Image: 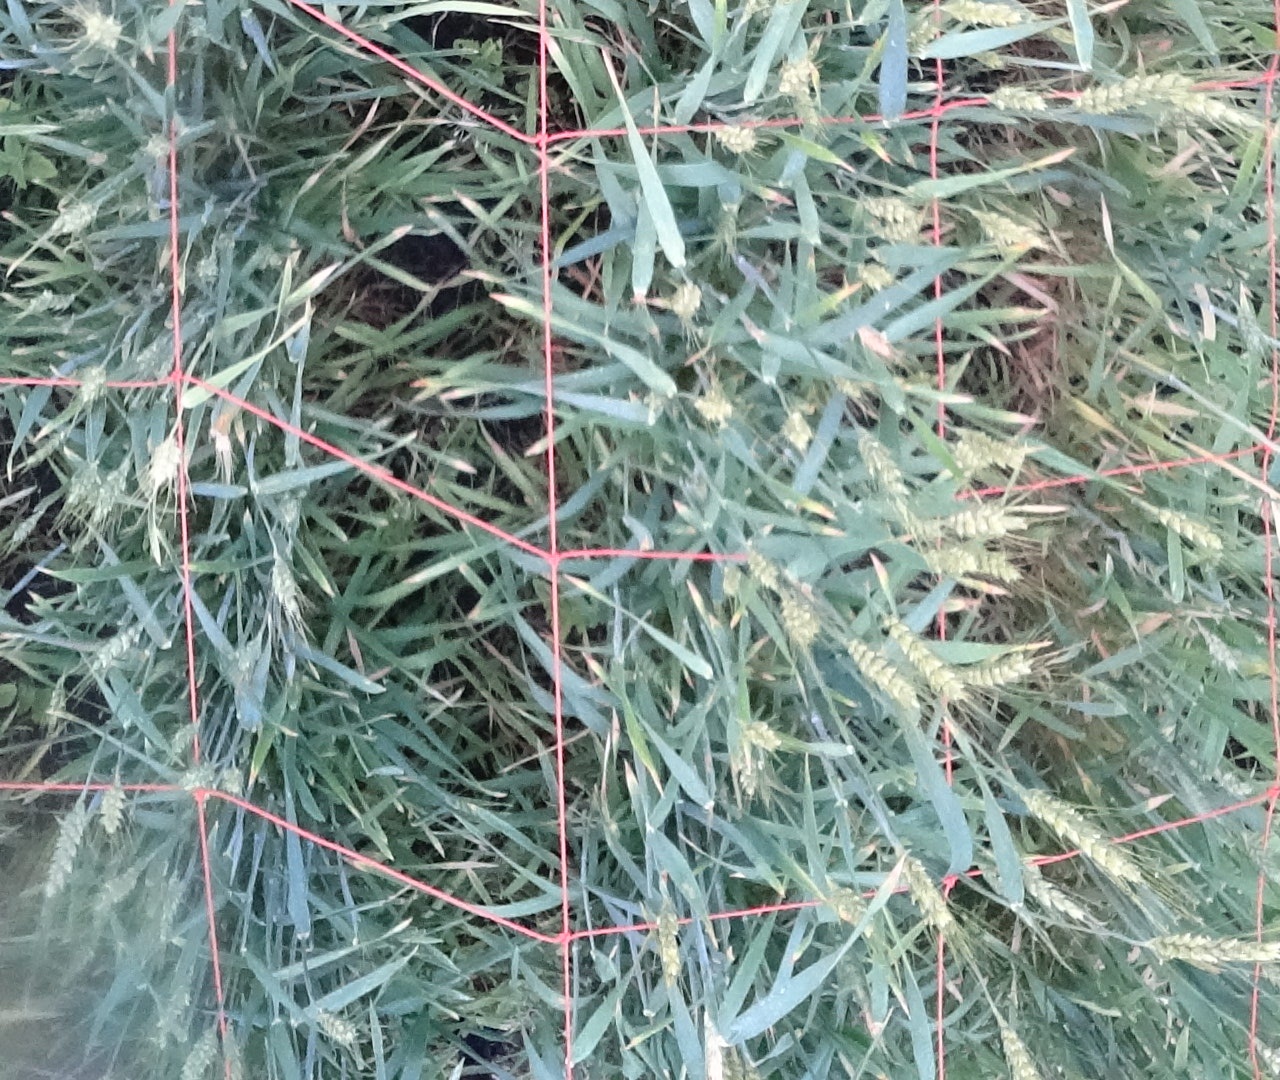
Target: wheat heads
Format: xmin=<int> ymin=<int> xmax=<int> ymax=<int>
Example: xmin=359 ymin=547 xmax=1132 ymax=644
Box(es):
xmin=903 ymin=521 xmax=945 ymax=543
xmin=972 ymin=51 xmax=1004 ymax=70
xmin=102 ymin=781 xmax=129 ymax=829
xmin=278 ymin=497 xmax=300 ymax=526
xmin=147 ymin=132 xmax=176 ymax=157
xmin=98 ymin=469 xmax=128 ymax=520
xmin=78 ymin=104 xmax=108 ymax=120
xmin=44 ymin=804 xmax=85 ymax=894
xmin=836 ymin=376 xmax=862 ymax=399
xmin=59 ymin=947 xmax=96 ymax=982
xmin=160 ymin=977 xmax=193 ymax=1039
xmin=1048 ymin=22 xmax=1079 ymax=45
xmin=147 ymin=435 xmax=181 ymax=490
xmin=952 ymin=424 xmax=1020 ymax=470
xmin=1028 ymin=873 xmax=1085 ymax=927
xmin=627 ymin=649 xmax=671 ymax=695
xmin=222 ymin=766 xmax=243 ymax=796
xmin=979 ymin=208 xmax=1045 ymax=251
xmin=48 ymin=683 xmax=67 ymax=716
xmin=76 ymin=15 xmax=118 ymax=51
xmin=18 ymin=430 xmax=66 ymax=468
xmin=898 ymin=851 xmax=954 ymax=928
xmin=198 ymin=256 xmax=222 ymax=286
xmin=874 ymin=221 xmax=920 ymax=241
xmin=1235 ymin=298 xmax=1261 ymax=358
xmin=318 ymin=1006 xmax=355 ymax=1044
xmin=1159 ymin=509 xmax=1222 ymax=550
xmin=997 ymin=1027 xmax=1037 ymax=1080
xmin=172 ymin=718 xmax=201 ymax=753
xmin=739 ymin=755 xmax=760 ymax=800
xmin=99 ymin=625 xmax=141 ymax=663
xmin=97 ymin=871 xmax=144 ymax=905
xmin=1202 ymin=761 xmax=1247 ymax=794
xmin=714 ymin=203 xmax=740 ymax=248
xmin=942 ymin=503 xmax=1016 ymax=534
xmin=989 ymin=85 xmax=1048 ymax=116
xmin=713 ymin=124 xmax=756 ymax=156
xmin=881 ymin=612 xmax=958 ymax=710
xmin=744 ymin=545 xmax=777 ymax=589
xmin=791 ymin=91 xmax=821 ymax=132
xmin=719 ymin=563 xmax=746 ymax=599
xmin=1203 ymin=628 xmax=1238 ymax=669
xmin=855 ymin=264 xmax=891 ymax=291
xmin=780 ymin=597 xmax=819 ymax=648
xmin=822 ymin=885 xmax=877 ymax=934
xmin=672 ymin=283 xmax=704 ymax=320
xmin=831 ymin=932 xmax=864 ymax=988
xmin=80 ymin=356 xmax=108 ymax=401
xmin=1169 ymin=86 xmax=1259 ymax=132
xmin=160 ymin=878 xmax=185 ymax=937
xmin=780 ymin=411 xmax=815 ymax=447
xmin=1018 ymin=789 xmax=1142 ymax=890
xmin=1243 ymin=824 xmax=1280 ymax=884
xmin=777 ymin=58 xmax=811 ymax=91
xmin=35 ymin=293 xmax=73 ymax=310
xmin=270 ymin=559 xmax=300 ymax=613
xmin=844 ymin=648 xmax=915 ymax=712
xmin=61 ymin=460 xmax=95 ymax=508
xmin=703 ymin=1015 xmax=730 ymax=1080
xmin=191 ymin=1024 xmax=220 ymax=1065
xmin=853 ymin=430 xmax=916 ymax=505
xmin=953 ymin=656 xmax=1032 ymax=687
xmin=920 ymin=547 xmax=974 ymax=572
xmin=859 ymin=195 xmax=913 ymax=220
xmin=1145 ymin=933 xmax=1278 ymax=967
xmin=933 ymin=0 xmax=1032 ymax=28
xmin=222 ymin=642 xmax=261 ymax=675
xmin=736 ymin=715 xmax=781 ymax=756
xmin=955 ymin=538 xmax=1017 ymax=583
xmin=181 ymin=765 xmax=215 ymax=794
xmin=1067 ymin=67 xmax=1185 ymax=115
xmin=854 ymin=320 xmax=894 ymax=358
xmin=653 ymin=899 xmax=685 ymax=991
xmin=691 ymin=388 xmax=736 ymax=425
xmin=58 ymin=194 xmax=98 ymax=235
